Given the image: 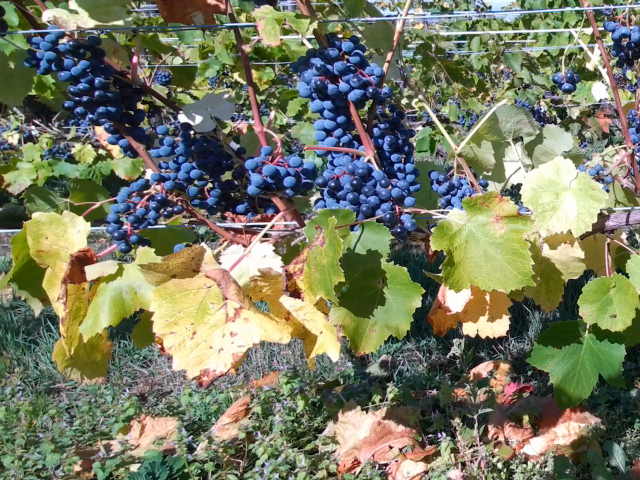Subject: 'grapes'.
<instances>
[{
  "label": "grapes",
  "mask_w": 640,
  "mask_h": 480,
  "mask_svg": "<svg viewBox=\"0 0 640 480\" xmlns=\"http://www.w3.org/2000/svg\"><path fill=\"white\" fill-rule=\"evenodd\" d=\"M428 178L431 180V191L442 195L439 203L444 205L445 210L458 209L462 211V200L477 193L476 188H472L466 177L453 176L450 178L448 174L429 171Z\"/></svg>",
  "instance_id": "grapes-5"
},
{
  "label": "grapes",
  "mask_w": 640,
  "mask_h": 480,
  "mask_svg": "<svg viewBox=\"0 0 640 480\" xmlns=\"http://www.w3.org/2000/svg\"><path fill=\"white\" fill-rule=\"evenodd\" d=\"M603 27L610 32L613 41L611 55L619 57L615 61V66L622 68L632 67L634 61L640 59V25L628 27L627 24L620 26L619 21L605 20Z\"/></svg>",
  "instance_id": "grapes-4"
},
{
  "label": "grapes",
  "mask_w": 640,
  "mask_h": 480,
  "mask_svg": "<svg viewBox=\"0 0 640 480\" xmlns=\"http://www.w3.org/2000/svg\"><path fill=\"white\" fill-rule=\"evenodd\" d=\"M326 39L330 41L329 48H310L291 64V70L299 73L298 96L308 99L312 114L318 112L321 116L314 123L318 147L342 143L344 148L364 152L361 138L347 132L356 129L349 104L364 109L370 99H375L377 105H383L392 96V89L377 86L385 71L376 62L366 60V47L356 35L341 41L331 32ZM356 67L369 77L355 73Z\"/></svg>",
  "instance_id": "grapes-3"
},
{
  "label": "grapes",
  "mask_w": 640,
  "mask_h": 480,
  "mask_svg": "<svg viewBox=\"0 0 640 480\" xmlns=\"http://www.w3.org/2000/svg\"><path fill=\"white\" fill-rule=\"evenodd\" d=\"M259 208L264 210L266 214L277 215L279 213V209L276 205H272V203L268 200H261L259 202Z\"/></svg>",
  "instance_id": "grapes-9"
},
{
  "label": "grapes",
  "mask_w": 640,
  "mask_h": 480,
  "mask_svg": "<svg viewBox=\"0 0 640 480\" xmlns=\"http://www.w3.org/2000/svg\"><path fill=\"white\" fill-rule=\"evenodd\" d=\"M165 219H171L173 215H179L184 212V208L181 205H174L172 199H167V195L164 192H158L147 202V208L141 207L135 211V213H129L127 215V222L132 227H137L139 230H144L148 224H157V219L162 217Z\"/></svg>",
  "instance_id": "grapes-6"
},
{
  "label": "grapes",
  "mask_w": 640,
  "mask_h": 480,
  "mask_svg": "<svg viewBox=\"0 0 640 480\" xmlns=\"http://www.w3.org/2000/svg\"><path fill=\"white\" fill-rule=\"evenodd\" d=\"M389 116L383 108L376 110L379 123L372 126V143L378 151L377 163L382 167L376 171L372 164L363 162V155L353 156L351 152L316 150V157H328L323 176L317 177V164L314 161H303L301 157H286L279 159L277 164H266L273 153V148L262 146L259 157H247L242 166L232 171V178L223 181L221 175L230 172L234 167V159L219 148L216 139L208 136L192 138L190 122L179 124V141L175 137H167L169 127L156 125L154 132L162 136L158 140L160 147H150L148 155L152 159L173 157L170 161H160L161 170L172 172L152 173L148 179H137L127 187H121L115 196V203L110 206V212L105 216L107 232L118 245L121 254L132 251L130 244L141 247H151L150 239H143L140 234L128 235L124 222L119 213L132 211L134 202L142 200L141 196H131L134 192L148 191L161 183L163 190L186 192L191 205L199 209H206L209 216L220 213H236L254 219L258 216L255 199L248 197L243 202L231 197V192L238 188L236 180H242L249 175L246 186L248 196H258L264 190L281 192L286 198H294L304 190H312L314 182L320 189V197L313 203L315 210L348 209L356 213V220L363 222L366 217L382 216V224L398 239H406L409 232L416 230V221L409 213L394 212L393 205L412 207L416 204L417 193L421 189L420 175L415 163V148L409 142L415 136L413 129H405L401 120L405 118L403 110H397L394 104L387 106ZM213 188L208 190V198H196L199 195L197 187H190L197 181L199 188L209 184Z\"/></svg>",
  "instance_id": "grapes-1"
},
{
  "label": "grapes",
  "mask_w": 640,
  "mask_h": 480,
  "mask_svg": "<svg viewBox=\"0 0 640 480\" xmlns=\"http://www.w3.org/2000/svg\"><path fill=\"white\" fill-rule=\"evenodd\" d=\"M637 116V109H629L628 116L626 117L628 123H631V127L629 128L631 144L637 143L633 149L634 153H640V117Z\"/></svg>",
  "instance_id": "grapes-8"
},
{
  "label": "grapes",
  "mask_w": 640,
  "mask_h": 480,
  "mask_svg": "<svg viewBox=\"0 0 640 480\" xmlns=\"http://www.w3.org/2000/svg\"><path fill=\"white\" fill-rule=\"evenodd\" d=\"M471 169V172L473 174V176L477 179L478 184L482 187V188H487L489 185V182L485 179V178H480V175L474 171L472 166H469Z\"/></svg>",
  "instance_id": "grapes-10"
},
{
  "label": "grapes",
  "mask_w": 640,
  "mask_h": 480,
  "mask_svg": "<svg viewBox=\"0 0 640 480\" xmlns=\"http://www.w3.org/2000/svg\"><path fill=\"white\" fill-rule=\"evenodd\" d=\"M66 36L65 32L47 33L44 38L29 36L26 44L29 47L23 60L26 68H35L38 75H49L57 72L61 82H68L67 93L73 101H66L62 109L74 113L77 118L87 115L88 122L101 127L110 136L107 142L118 145L124 155L131 159L138 157V152L117 131L112 121L119 119L127 123L128 133L141 145L147 146L152 136L145 135L139 125L144 121L146 113L137 108L148 94L132 83H126L115 77L113 83L119 86V92L106 88V78L115 74L110 64H105V51L99 48L102 39L97 35H88L80 40H68L59 43Z\"/></svg>",
  "instance_id": "grapes-2"
},
{
  "label": "grapes",
  "mask_w": 640,
  "mask_h": 480,
  "mask_svg": "<svg viewBox=\"0 0 640 480\" xmlns=\"http://www.w3.org/2000/svg\"><path fill=\"white\" fill-rule=\"evenodd\" d=\"M579 81L580 76L575 74L574 70H566L564 74L562 71H558L552 76V82L564 94H573L577 90Z\"/></svg>",
  "instance_id": "grapes-7"
}]
</instances>
